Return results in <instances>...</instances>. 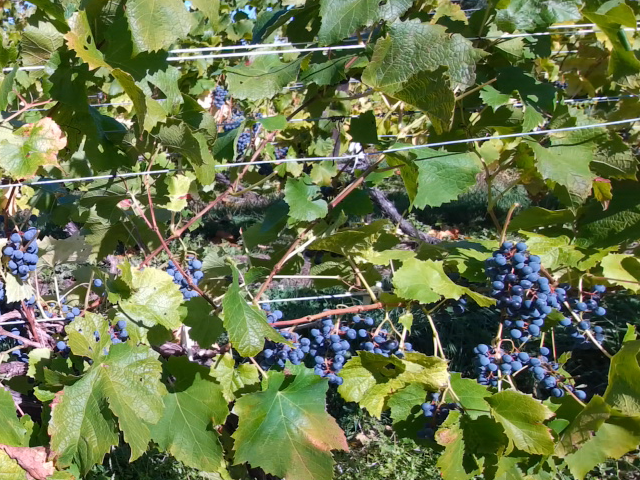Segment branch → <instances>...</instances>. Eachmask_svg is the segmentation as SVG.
Here are the masks:
<instances>
[{"label": "branch", "mask_w": 640, "mask_h": 480, "mask_svg": "<svg viewBox=\"0 0 640 480\" xmlns=\"http://www.w3.org/2000/svg\"><path fill=\"white\" fill-rule=\"evenodd\" d=\"M320 224V221L318 219H314L312 220L308 226L306 227V229L302 230L294 239L293 241L289 244V246L287 247L285 253L283 254V256L281 257L280 261L278 262V264L271 270L269 271L260 281L258 287L256 288V292H255V297L254 300L256 302H259L262 299V294H263V290L265 289L267 283L275 276L277 275L281 269L285 266V264L288 262V259L290 258V256L292 255L294 249L296 248V246L300 243V241L308 236L315 227H317Z\"/></svg>", "instance_id": "branch-3"}, {"label": "branch", "mask_w": 640, "mask_h": 480, "mask_svg": "<svg viewBox=\"0 0 640 480\" xmlns=\"http://www.w3.org/2000/svg\"><path fill=\"white\" fill-rule=\"evenodd\" d=\"M18 192V188H12L8 191V194L4 200V202L1 204L0 207V225L3 229H6L8 227V223H7V209L8 206L12 203V200L15 196V194Z\"/></svg>", "instance_id": "branch-6"}, {"label": "branch", "mask_w": 640, "mask_h": 480, "mask_svg": "<svg viewBox=\"0 0 640 480\" xmlns=\"http://www.w3.org/2000/svg\"><path fill=\"white\" fill-rule=\"evenodd\" d=\"M251 171V166H244V169L240 171L238 175H236L229 183V185L219 194V196L211 202L206 208L196 213L188 220H186L181 227H179L175 232L170 234L169 236H163V232L161 231L160 225L158 224L155 201L153 195V187H152V176H144L145 178V189H146V197L148 203L149 217L151 226L156 234V238L158 241L157 247H155L148 256L143 259L138 265L137 268L142 270L145 266L153 261V259L158 255L161 251L168 257V259L172 262V264L176 267V269L181 274L182 278L187 281L198 293L200 299L212 310H217L219 305L212 301L207 295L204 289L200 286V284L191 277L182 263L175 257L173 252L169 249L168 244L180 237L192 224L196 223L198 220L202 219L206 215H208L213 209H215L231 192L235 190L236 185L242 181L246 175Z\"/></svg>", "instance_id": "branch-1"}, {"label": "branch", "mask_w": 640, "mask_h": 480, "mask_svg": "<svg viewBox=\"0 0 640 480\" xmlns=\"http://www.w3.org/2000/svg\"><path fill=\"white\" fill-rule=\"evenodd\" d=\"M278 132H279V129L277 127H274L273 129H271L269 133L266 135V138L264 139L263 143L252 153V155L250 156V159L256 160L268 148V146L270 145L273 138L276 136Z\"/></svg>", "instance_id": "branch-7"}, {"label": "branch", "mask_w": 640, "mask_h": 480, "mask_svg": "<svg viewBox=\"0 0 640 480\" xmlns=\"http://www.w3.org/2000/svg\"><path fill=\"white\" fill-rule=\"evenodd\" d=\"M20 305L23 309L24 315L26 317L27 323L30 327V329L32 330L33 333V337L34 340H30L28 338L16 335V334H12L11 331L7 330L6 328L0 327V334L1 335H5L7 338H9L10 340L26 345L28 347H32V348H38L41 349L43 347V343L40 341L41 340V335H40V331L39 328L37 327L33 315L31 313V309L28 307V305L26 304V300L22 299L20 301Z\"/></svg>", "instance_id": "branch-4"}, {"label": "branch", "mask_w": 640, "mask_h": 480, "mask_svg": "<svg viewBox=\"0 0 640 480\" xmlns=\"http://www.w3.org/2000/svg\"><path fill=\"white\" fill-rule=\"evenodd\" d=\"M386 159H387V156L385 154L379 155L356 180H354L350 185H348L346 188L342 190L338 198H334L331 201H329L327 203V207L329 209H332L336 205H341L343 201L347 198L348 194L352 192L356 187H358Z\"/></svg>", "instance_id": "branch-5"}, {"label": "branch", "mask_w": 640, "mask_h": 480, "mask_svg": "<svg viewBox=\"0 0 640 480\" xmlns=\"http://www.w3.org/2000/svg\"><path fill=\"white\" fill-rule=\"evenodd\" d=\"M402 304H403V301L401 299H398L390 302L371 303L368 305H362V306H357L352 308L324 310L314 314H309L305 317L292 318L290 320L272 321L268 324V327L270 329H274V328H282V327H292L294 325H300V324H307L311 321H316L321 318L338 316L342 309H345L347 311V315H354V314L370 312L373 310H381V309H384L386 305H390L392 308H397V307H400Z\"/></svg>", "instance_id": "branch-2"}]
</instances>
